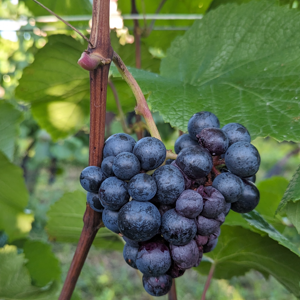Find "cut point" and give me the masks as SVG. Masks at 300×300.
Instances as JSON below:
<instances>
[{
    "label": "cut point",
    "instance_id": "6a23745f",
    "mask_svg": "<svg viewBox=\"0 0 300 300\" xmlns=\"http://www.w3.org/2000/svg\"><path fill=\"white\" fill-rule=\"evenodd\" d=\"M111 62H113L119 72L121 73L122 77L127 81L130 85V89L132 90V94L136 101V106L134 107V111L144 117L147 127L149 129V134L151 137L157 138L158 140L162 141L161 136L159 134V130L156 126V123L153 119L151 110L149 109V105L145 100V96L142 93L139 84L132 76V74L127 70L125 67L124 61L120 58V56L114 51L111 46Z\"/></svg>",
    "mask_w": 300,
    "mask_h": 300
}]
</instances>
